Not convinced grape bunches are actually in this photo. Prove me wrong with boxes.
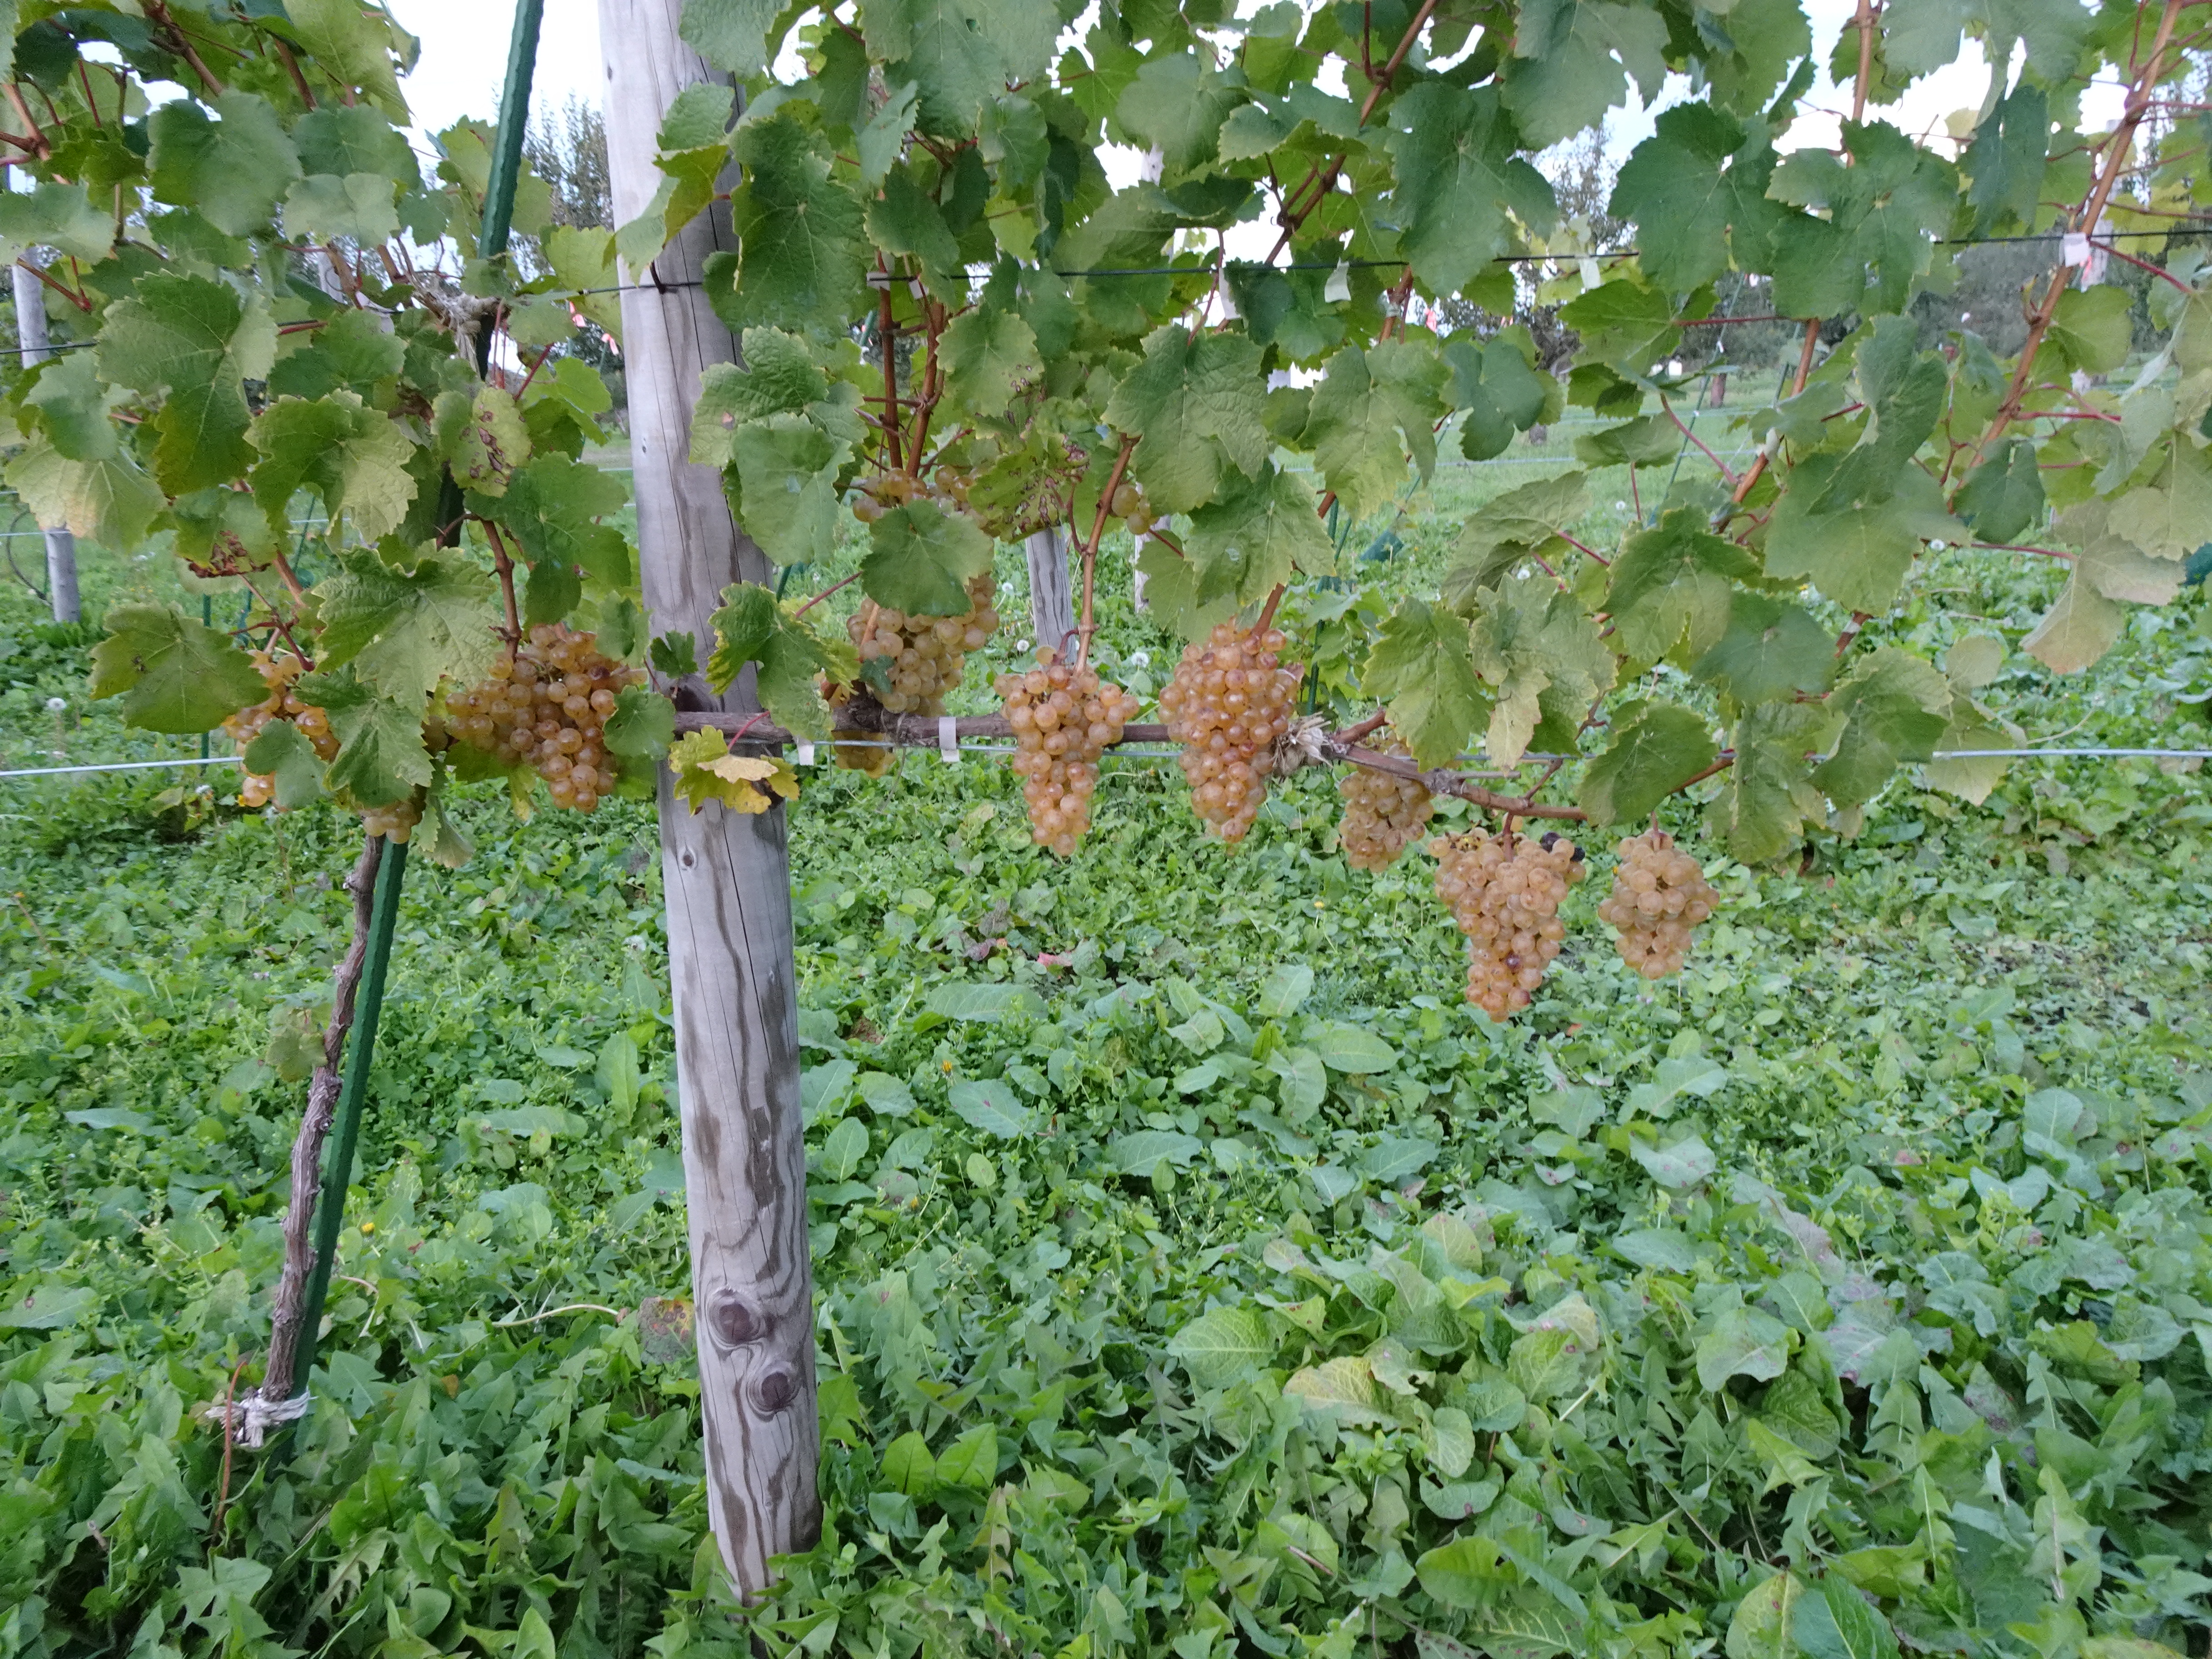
[1336,730,1438,873]
[1156,615,1304,859]
[1111,483,1159,535]
[993,644,1140,862]
[1597,828,1720,979]
[221,649,338,811]
[521,625,632,815]
[851,467,932,522]
[1428,812,1586,1022]
[330,699,449,843]
[925,460,1009,538]
[811,671,893,778]
[439,648,538,783]
[847,569,1000,717]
